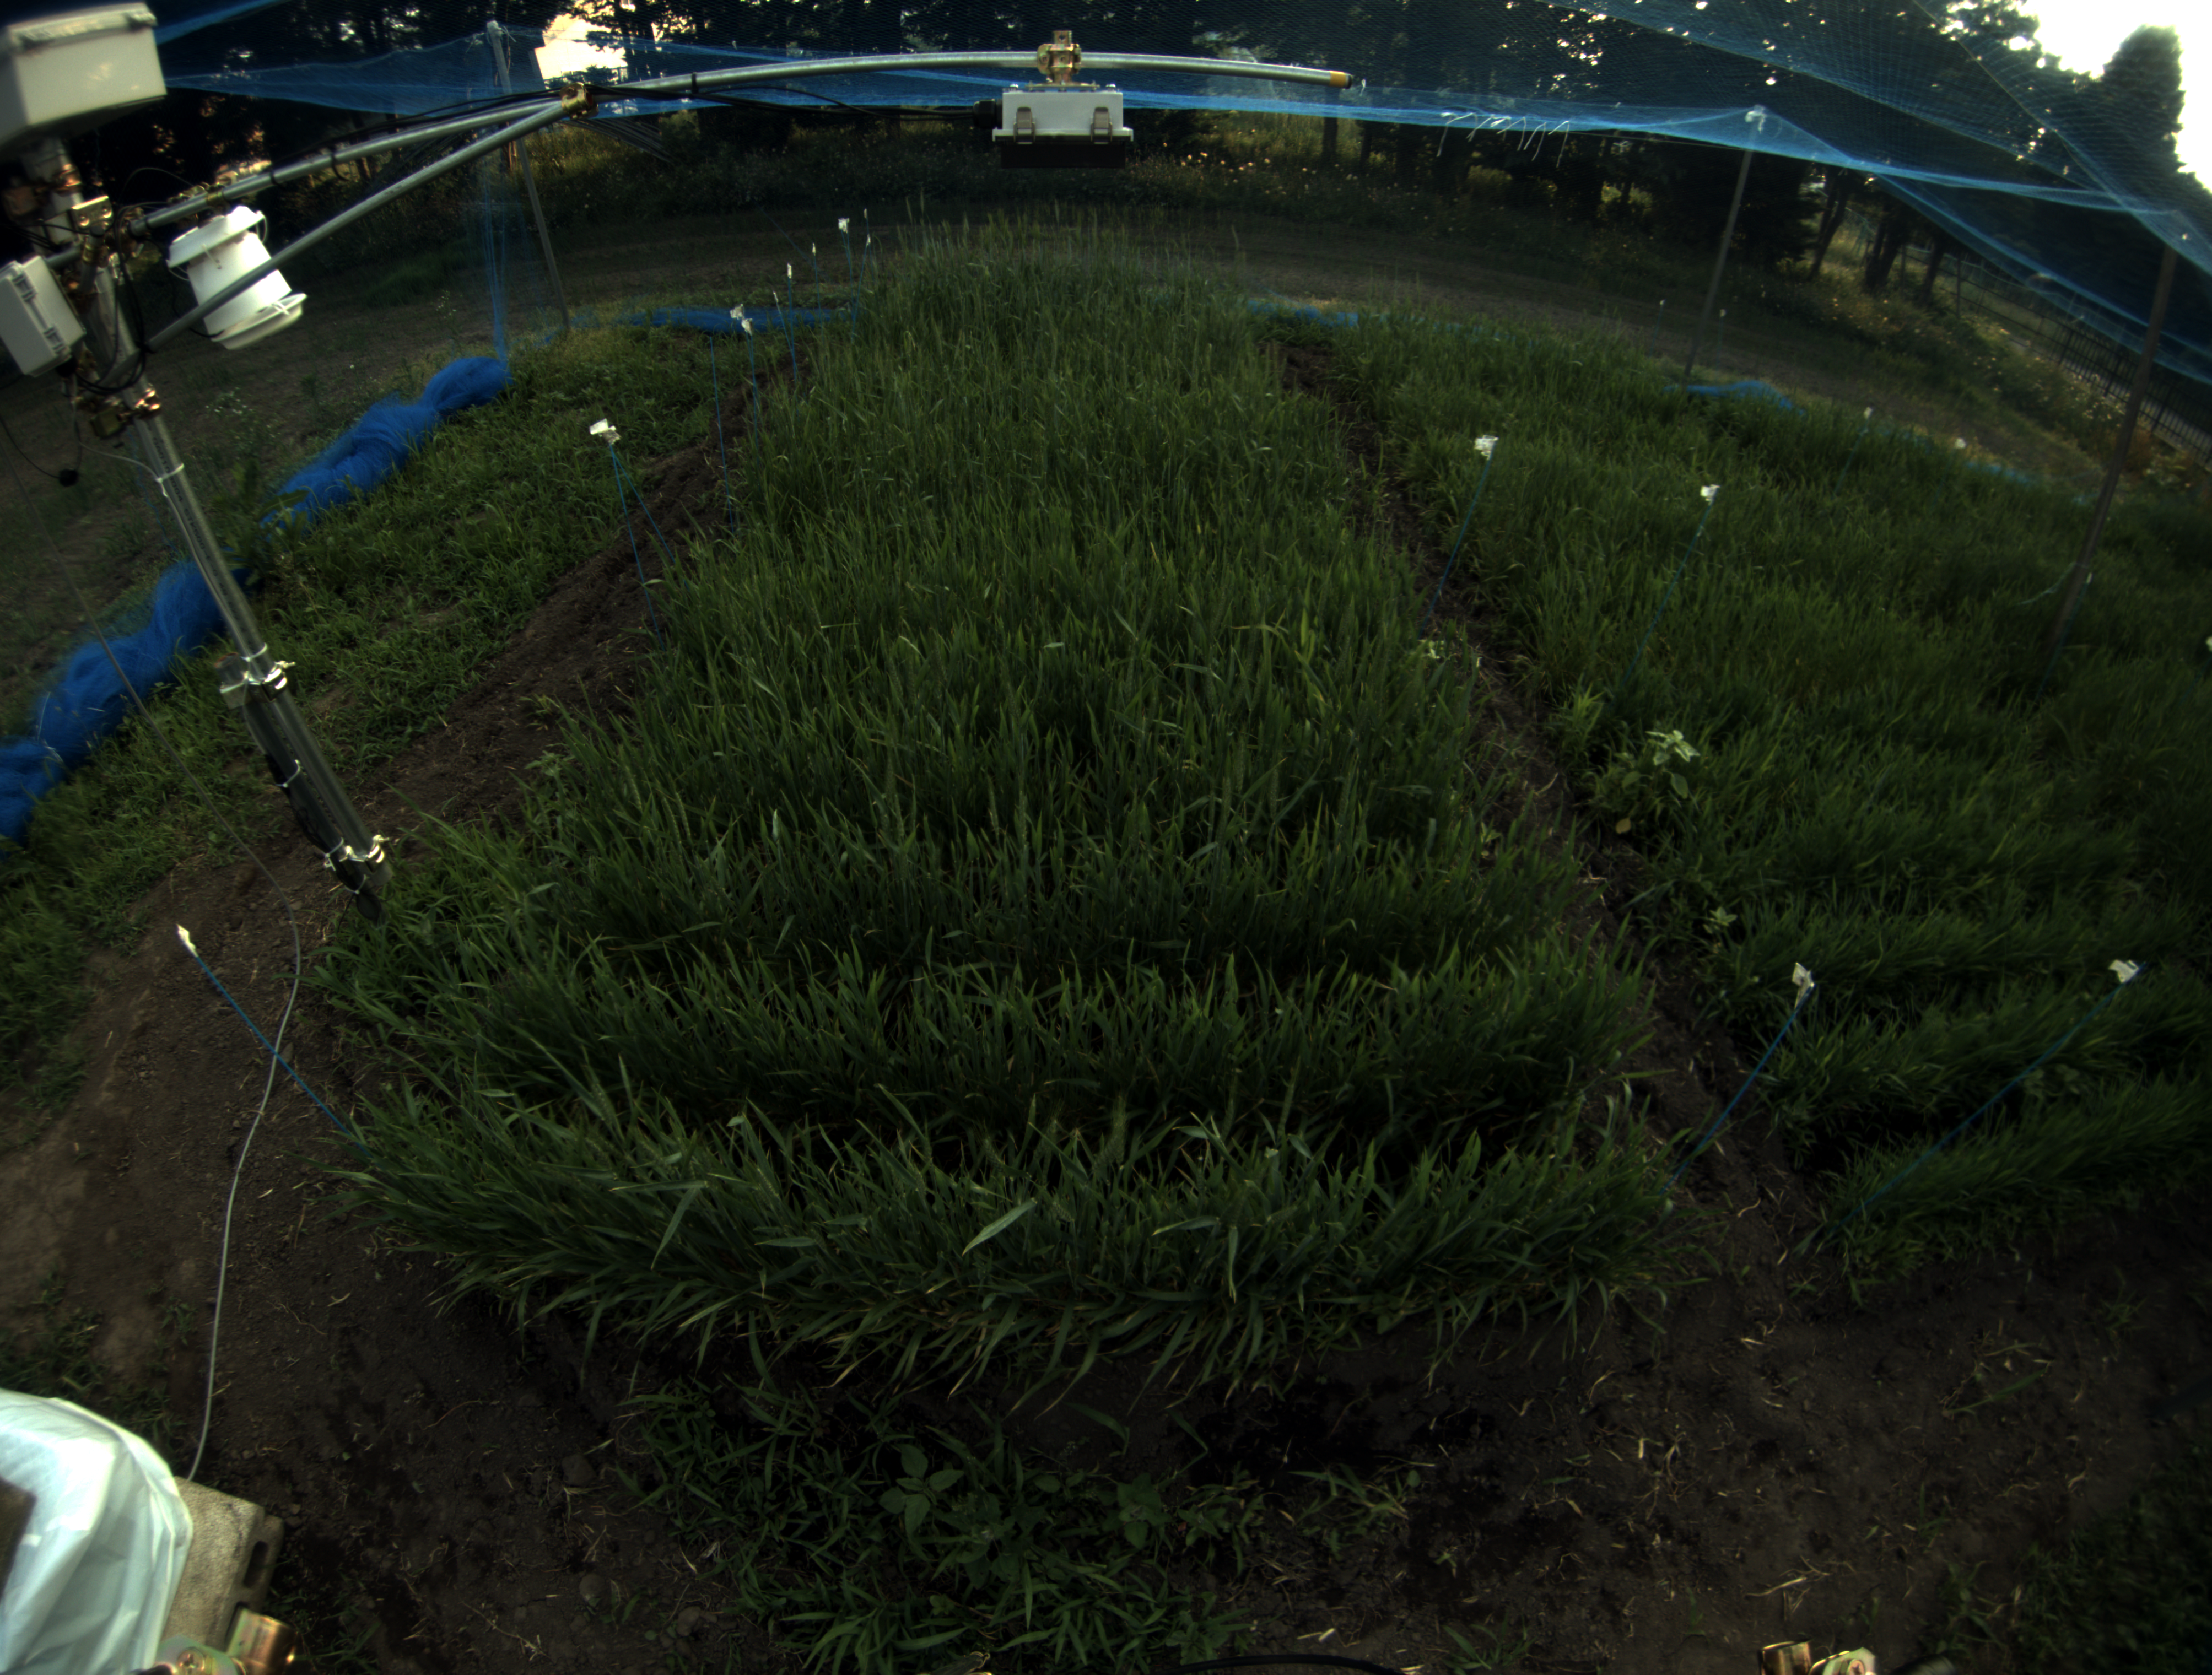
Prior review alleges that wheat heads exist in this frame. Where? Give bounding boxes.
[638,1237,657,1249]
[824,353,831,370]
[1272,1206,1297,1223]
[1019,789,1028,845]
[629,747,639,765]
[909,385,917,411]
[1047,620,1051,634]
[638,1139,676,1175]
[952,511,956,546]
[1180,425,1187,446]
[1130,814,1138,852]
[1340,809,1353,846]
[1469,894,1477,909]
[1253,868,1261,899]
[810,1229,827,1250]
[890,1166,904,1195]
[727,599,739,629]
[591,1083,612,1126]
[1334,444,1340,463]
[1066,371,1076,400]
[757,1185,769,1206]
[865,367,872,390]
[1622,440,1637,460]
[1259,539,1265,572]
[964,418,970,439]
[1383,689,1390,706]
[984,1139,1007,1176]
[1375,613,1385,648]
[753,1189,765,1208]
[888,656,904,698]
[811,357,817,370]
[926,515,939,549]
[737,614,745,637]
[2099,895,2118,931]
[890,718,898,742]
[1321,716,1328,740]
[1051,355,1056,371]
[406,1202,422,1213]
[1091,1135,1117,1171]
[508,1146,515,1156]
[818,350,823,368]
[1235,739,1245,791]
[1125,658,1134,706]
[750,553,756,575]
[879,369,885,387]
[595,1134,622,1159]
[675,792,691,836]
[702,1150,718,1186]
[712,683,722,716]
[1376,678,1384,720]
[670,841,681,864]
[1247,626,1256,653]
[1318,585,1328,616]
[1635,476,1650,491]
[1163,282,1168,296]
[624,766,643,811]
[857,530,862,550]
[1043,1145,1052,1184]
[714,564,727,593]
[1212,592,1225,634]
[617,767,628,788]
[1461,722,1475,745]
[886,757,893,806]
[500,1129,515,1146]
[707,553,713,580]
[1165,432,1173,450]
[952,594,957,608]
[721,616,732,646]
[1210,791,1215,818]
[1088,869,1098,883]
[572,1172,581,1184]
[1245,802,1263,841]
[879,809,889,831]
[1144,698,1157,734]
[724,611,736,643]
[664,797,679,839]
[1080,395,1086,414]
[749,604,755,628]
[412,1124,441,1148]
[896,282,902,303]
[1379,648,1389,676]
[1046,401,1052,424]
[894,793,905,837]
[536,796,552,839]
[1038,449,1044,466]
[924,1137,934,1169]
[1034,450,1040,467]
[907,659,917,706]
[1219,1203,1233,1221]
[1190,374,1196,397]
[1561,1096,1583,1121]
[1250,678,1262,711]
[756,1168,776,1194]
[1052,333,1057,351]
[1206,663,1215,708]
[1223,778,1231,818]
[859,1186,869,1218]
[1191,610,1197,643]
[1034,1120,1056,1159]
[1354,707,1368,735]
[905,287,909,300]
[651,818,663,847]
[1372,738,1384,755]
[845,363,851,392]
[834,391,840,409]
[1270,769,1279,819]
[931,652,941,690]
[611,788,628,815]
[900,855,906,880]
[1283,988,1293,1012]
[1276,1083,1295,1138]
[765,576,772,611]
[1702,697,1712,716]
[1402,678,1420,716]
[1561,562,1568,589]
[1203,344,1211,358]
[1624,460,1630,475]
[699,733,708,753]
[1217,815,1227,847]
[1114,1113,1125,1164]
[888,425,892,443]
[1246,1166,1265,1196]
[1221,1099,1236,1142]
[917,355,922,380]
[1368,661,1378,689]
[889,359,894,375]
[1152,384,1157,405]
[1053,1200,1073,1222]
[1493,733,1523,774]
[1231,1197,1247,1227]
[521,890,528,910]
[875,344,879,362]
[627,823,638,834]
[988,341,996,353]
[811,598,822,626]
[1479,913,1492,935]
[585,1137,612,1170]
[1104,352,1109,373]
[773,614,780,634]
[1116,690,1122,712]
[1313,1137,1333,1162]
[1355,803,1369,839]
[935,333,942,357]
[931,455,935,474]
[1339,772,1352,817]
[543,1165,578,1189]
[934,848,941,871]
[711,876,728,901]
[1229,664,1252,715]
[1259,725,1265,749]
[1006,682,1021,726]
[1184,291,1188,308]
[1335,605,1352,644]
[1137,609,1152,646]
[501,902,521,939]
[960,704,967,729]
[699,564,704,573]
[888,566,893,597]
[1126,543,1135,576]
[652,998,669,1018]
[1351,664,1363,697]
[1111,1026,1119,1053]
[752,583,762,613]
[907,335,912,353]
[913,1168,927,1199]
[1196,1167,1204,1193]
[990,791,1000,837]
[930,627,948,686]
[883,339,889,356]
[677,1136,695,1179]
[1334,636,1349,681]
